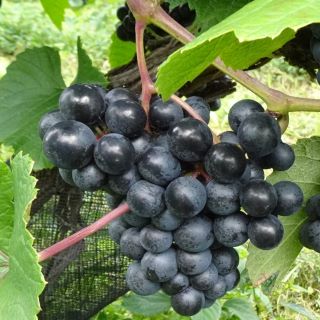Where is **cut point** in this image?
<instances>
[{
	"instance_id": "1",
	"label": "cut point",
	"mask_w": 320,
	"mask_h": 320,
	"mask_svg": "<svg viewBox=\"0 0 320 320\" xmlns=\"http://www.w3.org/2000/svg\"><path fill=\"white\" fill-rule=\"evenodd\" d=\"M151 24L146 19H135V30H136V57H137V64L139 68V73L142 81V94L140 96L141 105L144 107L147 120H146V131H151L149 127V119H148V112H149V101L151 94L157 93L159 88L154 87V83L151 81L144 57V50H143V29Z\"/></svg>"
}]
</instances>
